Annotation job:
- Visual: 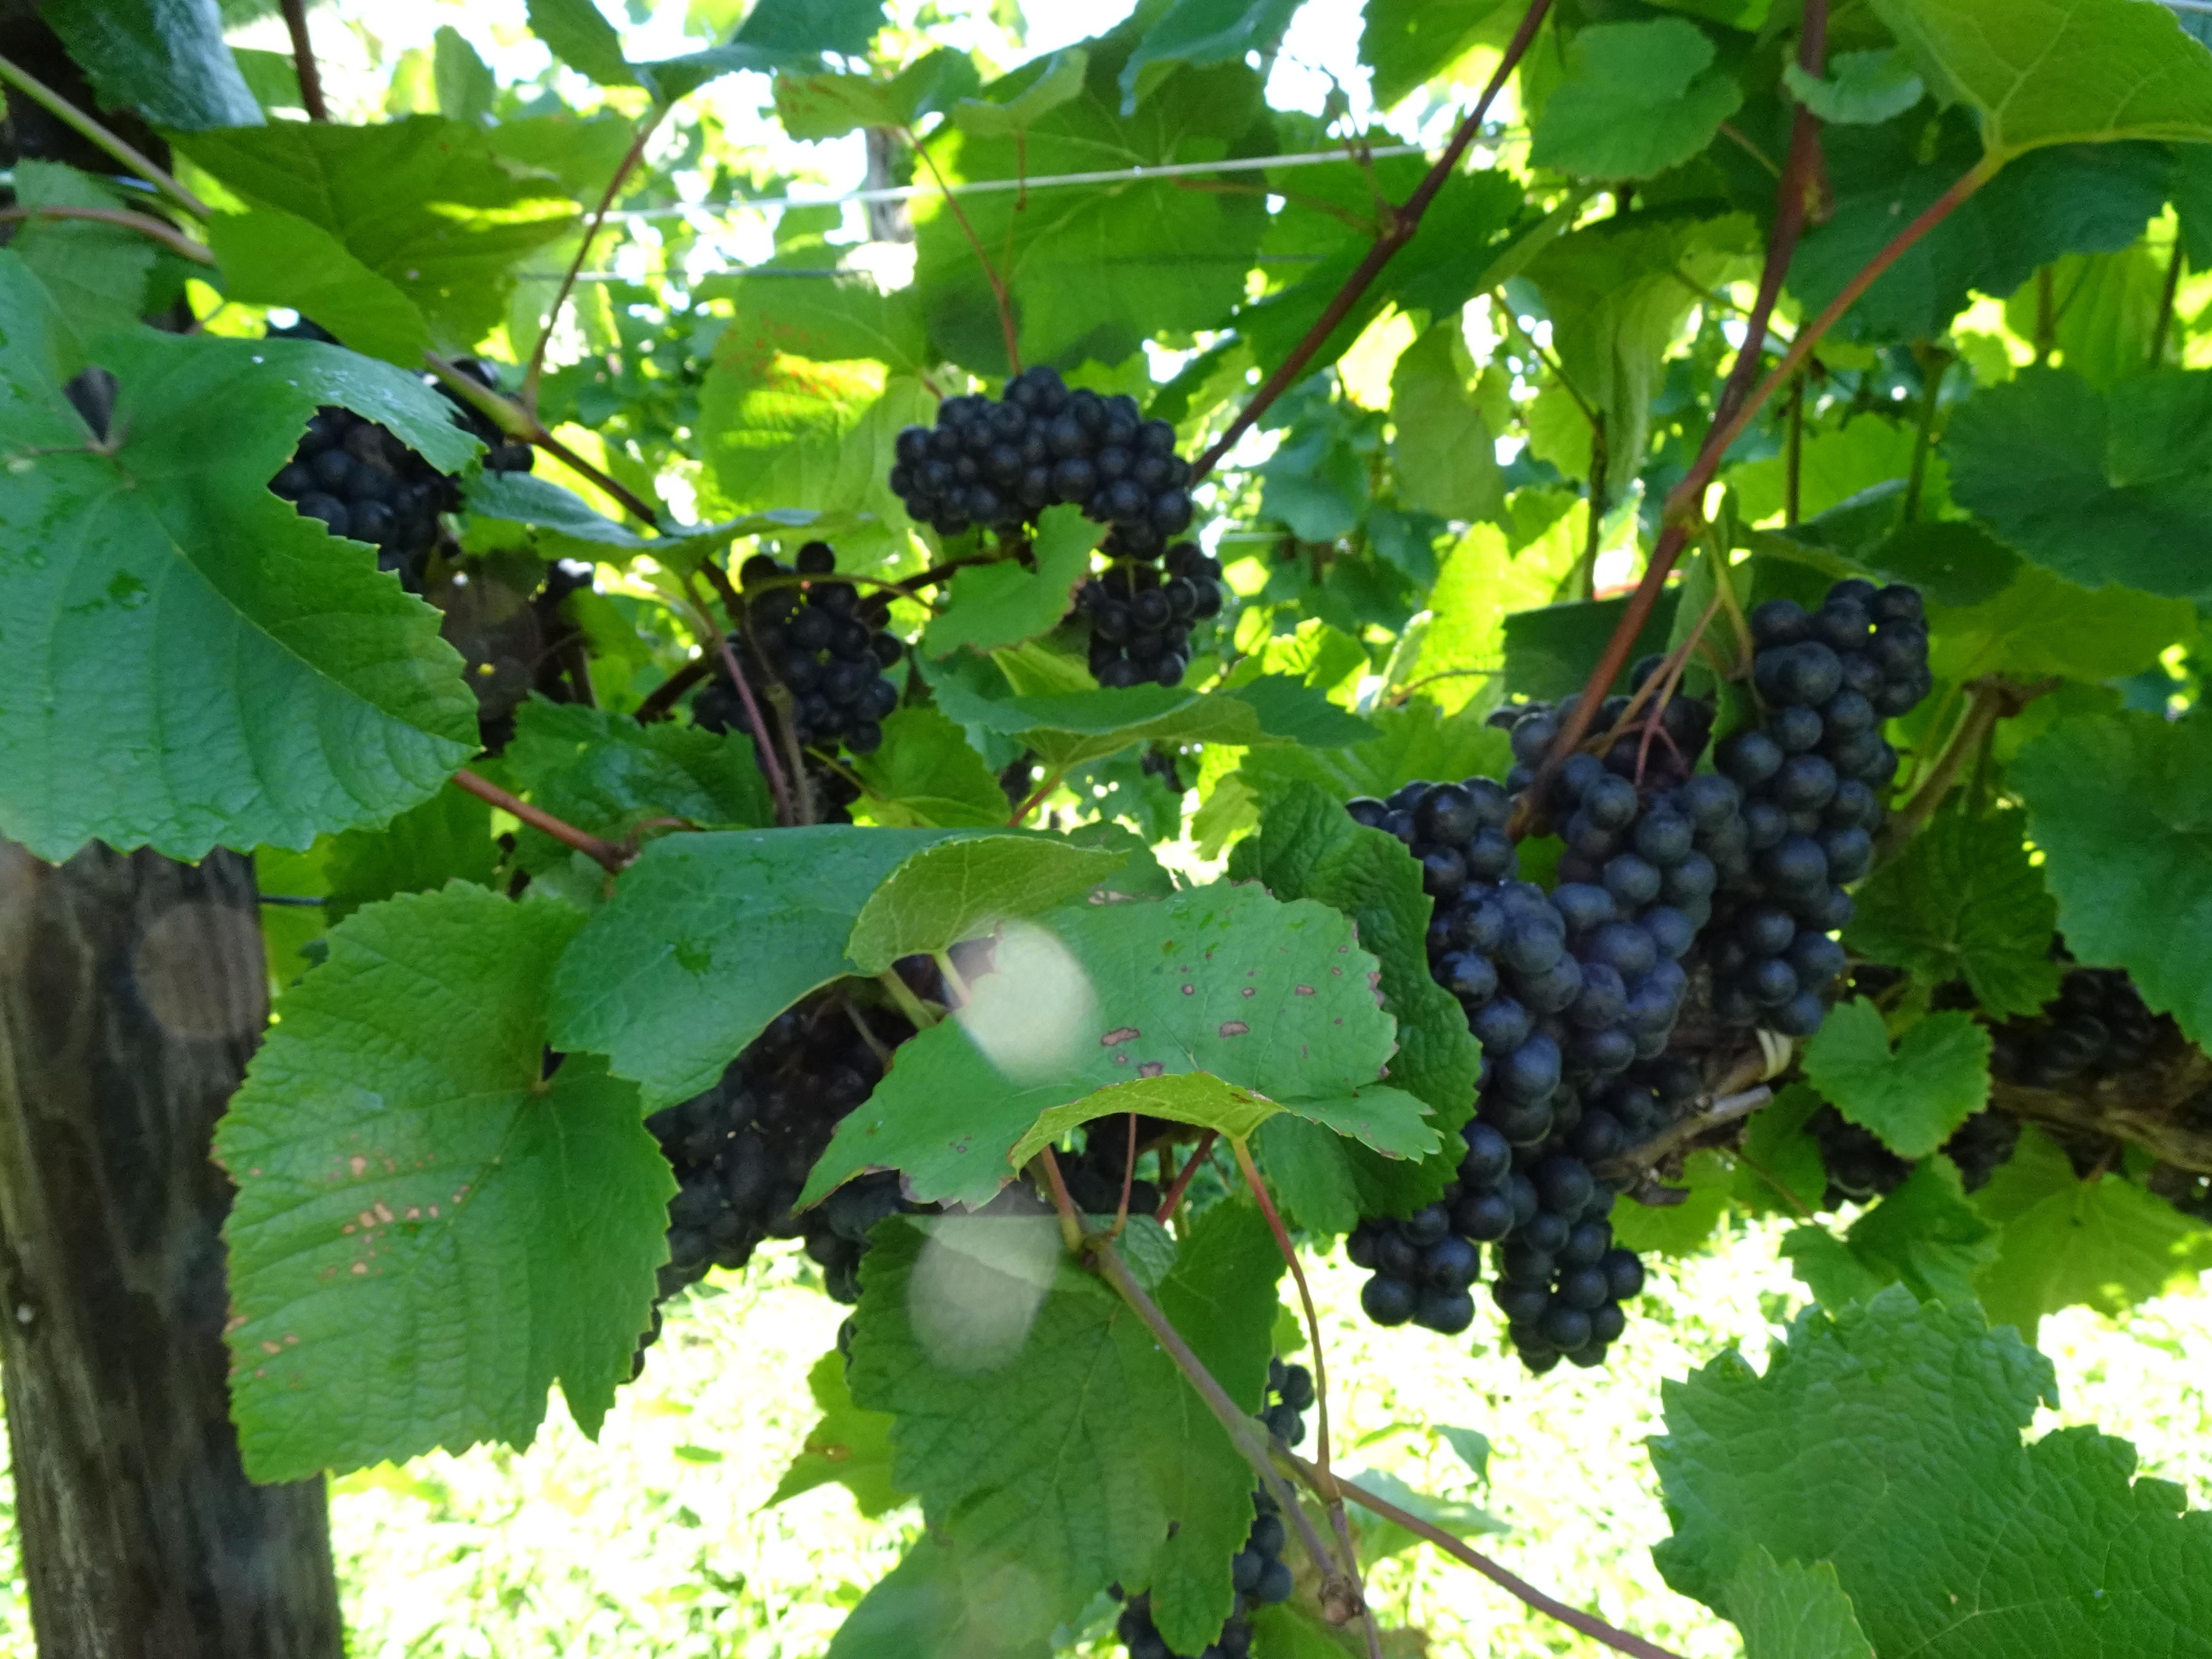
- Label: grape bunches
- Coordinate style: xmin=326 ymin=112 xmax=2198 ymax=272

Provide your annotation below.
xmin=755 ymin=1037 xmax=953 ymax=1372
xmin=1345 ymin=777 xmax=1531 ymax=966
xmin=1702 ymin=576 xmax=1934 ymax=1035
xmin=267 ymin=359 xmax=533 ymax=600
xmin=1348 ymin=1121 xmax=1513 ymax=1334
xmin=1033 ymin=1146 xmax=1160 ymax=1217
xmin=1799 ymin=1032 xmax=2024 ymax=1214
xmin=440 ymin=555 xmax=574 ymax=757
xmin=1492 ymin=1060 xmax=1693 ymax=1373
xmin=1492 ymin=658 xmax=1742 ymax=1076
xmin=689 ymin=539 xmax=900 ymax=828
xmin=2026 ymin=957 xmax=2195 ymax=1159
xmin=617 ymin=1017 xmax=806 ymax=1384
xmin=1106 ymin=1355 xmax=1314 ymax=1659
xmin=1050 ymin=386 xmax=1222 ymax=693
xmin=888 ymin=369 xmax=1072 ymax=536
xmin=1429 ymin=885 xmax=1584 ymax=1144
